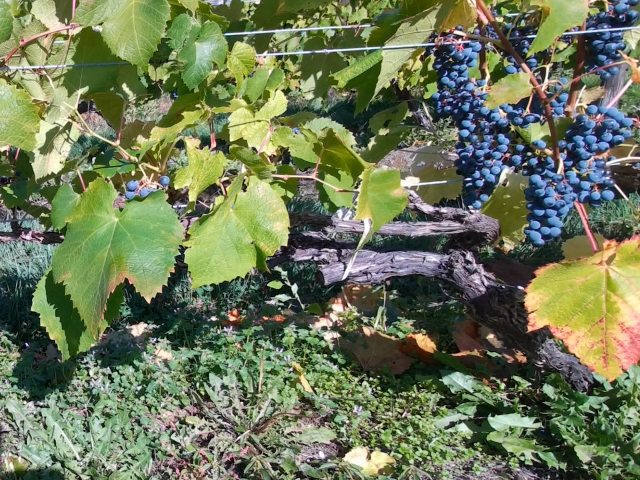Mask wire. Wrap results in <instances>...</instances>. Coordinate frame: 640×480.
Wrapping results in <instances>:
<instances>
[{
    "label": "wire",
    "instance_id": "4",
    "mask_svg": "<svg viewBox=\"0 0 640 480\" xmlns=\"http://www.w3.org/2000/svg\"><path fill=\"white\" fill-rule=\"evenodd\" d=\"M606 31H640V26H604V27H588L583 29H570L561 33L562 37L573 34H585L590 32H606Z\"/></svg>",
    "mask_w": 640,
    "mask_h": 480
},
{
    "label": "wire",
    "instance_id": "3",
    "mask_svg": "<svg viewBox=\"0 0 640 480\" xmlns=\"http://www.w3.org/2000/svg\"><path fill=\"white\" fill-rule=\"evenodd\" d=\"M125 61H106L101 63H67L48 65H27V66H0V71H29V70H50V69H70V68H104L108 66H125Z\"/></svg>",
    "mask_w": 640,
    "mask_h": 480
},
{
    "label": "wire",
    "instance_id": "2",
    "mask_svg": "<svg viewBox=\"0 0 640 480\" xmlns=\"http://www.w3.org/2000/svg\"><path fill=\"white\" fill-rule=\"evenodd\" d=\"M377 26L376 22L369 24H329L320 26H306L300 28H281V29H259L253 31H238V32H224V37H240V36H255L261 34H283V33H302V32H316L332 29H345V30H357V29H372Z\"/></svg>",
    "mask_w": 640,
    "mask_h": 480
},
{
    "label": "wire",
    "instance_id": "1",
    "mask_svg": "<svg viewBox=\"0 0 640 480\" xmlns=\"http://www.w3.org/2000/svg\"><path fill=\"white\" fill-rule=\"evenodd\" d=\"M465 44H466L465 39H462L460 41L442 40V41H435V42H423L419 44L414 43V44L397 45V46L365 45L358 48L340 47L335 49H308V50H298V51H290V52L257 53L256 57L257 58L293 57V56L310 55V54H338L340 52L360 53L367 50L399 51V50H409V49H422L425 47H437V46H444V45L463 46Z\"/></svg>",
    "mask_w": 640,
    "mask_h": 480
},
{
    "label": "wire",
    "instance_id": "5",
    "mask_svg": "<svg viewBox=\"0 0 640 480\" xmlns=\"http://www.w3.org/2000/svg\"><path fill=\"white\" fill-rule=\"evenodd\" d=\"M462 178H449L444 180L430 181L426 183H402L403 188H429L432 186L447 185L452 183H462Z\"/></svg>",
    "mask_w": 640,
    "mask_h": 480
}]
</instances>
